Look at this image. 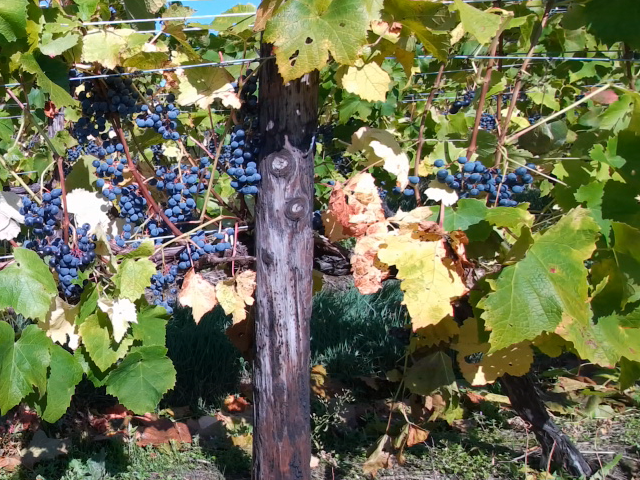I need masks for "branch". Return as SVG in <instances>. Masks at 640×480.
<instances>
[{"label": "branch", "instance_id": "obj_6", "mask_svg": "<svg viewBox=\"0 0 640 480\" xmlns=\"http://www.w3.org/2000/svg\"><path fill=\"white\" fill-rule=\"evenodd\" d=\"M493 65H494V60L490 59L488 65H487V69H486V75H485V78H484V84H483V88H482L480 102L478 103V106H477V114H476V117H475L474 128H473V131H472V134H471L470 146L468 147V150H467V157L468 158L472 157L473 151L477 148V145H476L477 133L479 131L480 119H481L482 114H483L482 108H483V106L485 104L487 90H488V86H489V81H490Z\"/></svg>", "mask_w": 640, "mask_h": 480}, {"label": "branch", "instance_id": "obj_8", "mask_svg": "<svg viewBox=\"0 0 640 480\" xmlns=\"http://www.w3.org/2000/svg\"><path fill=\"white\" fill-rule=\"evenodd\" d=\"M269 62V59H265L262 60L261 62H259L255 67L252 68V70L245 76L243 77L240 81L239 84L236 88L235 91V97L239 98L240 97V93L242 91V88L244 87V84L250 80L252 78V76L259 71L263 66H265L267 63Z\"/></svg>", "mask_w": 640, "mask_h": 480}, {"label": "branch", "instance_id": "obj_7", "mask_svg": "<svg viewBox=\"0 0 640 480\" xmlns=\"http://www.w3.org/2000/svg\"><path fill=\"white\" fill-rule=\"evenodd\" d=\"M552 6H553V2L549 1L547 3V7L545 9L543 17H542V19H541V21L539 23V26L537 27V29L535 30V32H534V34L532 36V40H531L530 46L528 48L527 55H532L533 54V50H534L535 45L537 43V39H538L539 34L541 33V31L543 30L544 25L546 24V21L548 20L550 11L552 9Z\"/></svg>", "mask_w": 640, "mask_h": 480}, {"label": "branch", "instance_id": "obj_11", "mask_svg": "<svg viewBox=\"0 0 640 480\" xmlns=\"http://www.w3.org/2000/svg\"><path fill=\"white\" fill-rule=\"evenodd\" d=\"M176 144L179 146L181 152L183 153V156L186 158V160L188 161L189 164L191 165H195L196 161L194 159L191 158V156L189 155L186 147L184 146V144L181 142L180 139L176 140Z\"/></svg>", "mask_w": 640, "mask_h": 480}, {"label": "branch", "instance_id": "obj_9", "mask_svg": "<svg viewBox=\"0 0 640 480\" xmlns=\"http://www.w3.org/2000/svg\"><path fill=\"white\" fill-rule=\"evenodd\" d=\"M129 133H130L132 139L134 140V142H135V144H136V146L138 148L139 154L147 162V164L149 166V169L150 170H154L155 169L154 163L152 162V160L145 153L144 148H143L139 138L137 137L135 130L134 129H130Z\"/></svg>", "mask_w": 640, "mask_h": 480}, {"label": "branch", "instance_id": "obj_4", "mask_svg": "<svg viewBox=\"0 0 640 480\" xmlns=\"http://www.w3.org/2000/svg\"><path fill=\"white\" fill-rule=\"evenodd\" d=\"M445 67L444 63H440L438 66V70H437V74H436V78L434 81V84L426 98V102H425V107H424V111H423V116L420 122V126H419V131H418V140H417V144H416V149H415V168H414V175L418 176L419 175V170H420V165H421V158H420V151H421V146L423 143V134H424V129H425V125H426V121L428 118V114H429V109H430V104H431V100L437 90V88L439 87V83L441 80V76H442V72H443V68Z\"/></svg>", "mask_w": 640, "mask_h": 480}, {"label": "branch", "instance_id": "obj_1", "mask_svg": "<svg viewBox=\"0 0 640 480\" xmlns=\"http://www.w3.org/2000/svg\"><path fill=\"white\" fill-rule=\"evenodd\" d=\"M97 86H98V89H99V90L103 93V95H104V98H105V101H106V105H107L108 111H109V113H110V115H111V117H112V119H113V121H114V123H115V128H116V131H117V135H118V138H119V142H120V143H121V145H122L123 154H124L125 159L127 160V165H128L129 171L131 172V174H132V176H133L134 180L136 181L138 188H139V189L141 190V192L143 193V195H144L145 199L150 203V206H151L152 210H153V211L158 215V217L160 218V220H161V221H162V222H163L167 227H169V228L172 230V232H173L174 234H176V235H178V236H181V235H182V232H181L180 230H178V229L174 226V224H173V223H171V222H170V221H169V220L164 216L163 212H162V211H161V210L156 206L155 201H154V200H153V198L149 195L148 190L145 188V186L143 185V183H142L141 179L139 178V176H138V174H137L136 170L134 169L133 162H132V158H131V157H130V155H129V152H128V146H127L126 140L124 139V136H123V132H122L121 125H120V120H119L118 116H117V115H116V113H115V110H114V108H113V105H112V102H111V99H110L109 93H108V91H107V88L103 86V83H102V81H101V80H98V81H97Z\"/></svg>", "mask_w": 640, "mask_h": 480}, {"label": "branch", "instance_id": "obj_3", "mask_svg": "<svg viewBox=\"0 0 640 480\" xmlns=\"http://www.w3.org/2000/svg\"><path fill=\"white\" fill-rule=\"evenodd\" d=\"M236 111L235 107H232L228 113L227 116V120L224 126V130L222 131V135L220 136L219 139V146H218V150L216 152V155L214 157L212 166H211V178L209 181L205 180V177L203 176V173L199 174V178L202 180V182L205 184V189L206 190V196H205V200H204V204L202 205V210L198 216V223L199 224H203L204 220L203 218L205 217V214L207 212V208L209 206V202H210V198H211V194L212 196L218 201V203L226 210L230 211L231 213H233L234 215H236L239 219L243 218V214L241 212H239L237 209L233 208L231 205H228L222 198L221 196L215 191L213 187V176L216 172V168L219 162V159L221 157V154L223 152V148H224V142H225V138L227 137V133L229 132V128L231 126L232 123V118L233 115Z\"/></svg>", "mask_w": 640, "mask_h": 480}, {"label": "branch", "instance_id": "obj_10", "mask_svg": "<svg viewBox=\"0 0 640 480\" xmlns=\"http://www.w3.org/2000/svg\"><path fill=\"white\" fill-rule=\"evenodd\" d=\"M502 45H503V35L500 34L499 32H496L494 34V42H493V46L491 48L490 54H495L496 50H497V54H503Z\"/></svg>", "mask_w": 640, "mask_h": 480}, {"label": "branch", "instance_id": "obj_2", "mask_svg": "<svg viewBox=\"0 0 640 480\" xmlns=\"http://www.w3.org/2000/svg\"><path fill=\"white\" fill-rule=\"evenodd\" d=\"M4 91L13 98V100L15 101V103L18 105L23 115L25 116L26 120L32 123L35 126V128L39 130V132L44 137L46 142L50 145L51 149L53 150L56 156L58 177L60 180V188L62 192V202H63V215H64V227H65L63 231V242L66 245H69L70 240L68 239V234L70 230V225H69V213H68V200H67V190L65 186V178L63 174L61 154L58 148L56 147L55 143L52 141V139L49 137L47 132L44 130V128L38 123V121L35 118H32L30 116V114L27 111V108L24 106V104L22 103L18 95L15 92H13L10 88H4Z\"/></svg>", "mask_w": 640, "mask_h": 480}, {"label": "branch", "instance_id": "obj_5", "mask_svg": "<svg viewBox=\"0 0 640 480\" xmlns=\"http://www.w3.org/2000/svg\"><path fill=\"white\" fill-rule=\"evenodd\" d=\"M529 63H530V60H524V62L522 64L521 72L517 77L516 86H515L514 91H513V96L511 98L510 106H509V109L507 110V114L505 116L504 127L502 128V131H501V133L499 135L498 142H497V156H496V159H495V166L496 167L500 166V162H501V159H502L503 140H504V137L506 136V133H507V131L509 129L510 118H511L512 113L514 111L516 100L518 98V93H519V90L521 88V83H522V80H523V78H524V76L526 74L527 66H528Z\"/></svg>", "mask_w": 640, "mask_h": 480}]
</instances>
